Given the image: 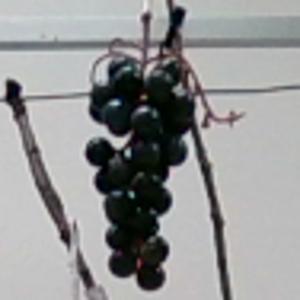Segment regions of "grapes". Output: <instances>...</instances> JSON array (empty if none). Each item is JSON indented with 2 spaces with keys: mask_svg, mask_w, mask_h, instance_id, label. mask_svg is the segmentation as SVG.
<instances>
[{
  "mask_svg": "<svg viewBox=\"0 0 300 300\" xmlns=\"http://www.w3.org/2000/svg\"><path fill=\"white\" fill-rule=\"evenodd\" d=\"M136 58L119 55L108 61V83L89 89L87 113L91 120L108 126L112 136L129 137L131 157L118 150L113 140L93 136L83 146L85 161L94 168L92 184L102 193V211L110 226L103 234L113 250L107 266L114 277L134 276L141 290L154 293L165 287L168 274L162 262L171 246L156 236L157 217L171 207L172 195L166 183L172 169L186 165L189 146L183 135L197 125L198 97L182 87L186 71L181 60L167 55L142 77Z\"/></svg>",
  "mask_w": 300,
  "mask_h": 300,
  "instance_id": "grapes-1",
  "label": "grapes"
}]
</instances>
